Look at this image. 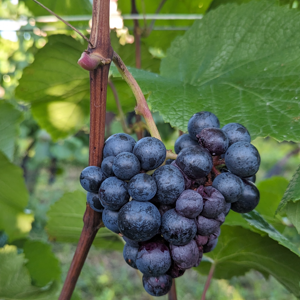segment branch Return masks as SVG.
<instances>
[{
  "instance_id": "30e6481e",
  "label": "branch",
  "mask_w": 300,
  "mask_h": 300,
  "mask_svg": "<svg viewBox=\"0 0 300 300\" xmlns=\"http://www.w3.org/2000/svg\"><path fill=\"white\" fill-rule=\"evenodd\" d=\"M89 71L90 80V133L89 164L101 168L105 142L106 96L108 85L114 94L117 110L121 117V127L129 135L136 133L139 139L144 137L143 130L149 133L142 116L135 112V125L127 127L126 118L120 107L118 92L109 78L111 62L110 39V0H93L92 28L87 49L77 62Z\"/></svg>"
},
{
  "instance_id": "325d2c04",
  "label": "branch",
  "mask_w": 300,
  "mask_h": 300,
  "mask_svg": "<svg viewBox=\"0 0 300 300\" xmlns=\"http://www.w3.org/2000/svg\"><path fill=\"white\" fill-rule=\"evenodd\" d=\"M104 227L102 213L94 211L86 202V210L83 215V229L80 235L79 244L70 261L69 270L58 300L71 299L81 270L86 262L90 247L92 246L98 231Z\"/></svg>"
},
{
  "instance_id": "170604dd",
  "label": "branch",
  "mask_w": 300,
  "mask_h": 300,
  "mask_svg": "<svg viewBox=\"0 0 300 300\" xmlns=\"http://www.w3.org/2000/svg\"><path fill=\"white\" fill-rule=\"evenodd\" d=\"M131 15L133 19L134 36H135V61L136 68H141V41L139 33V11L136 9V0H131Z\"/></svg>"
}]
</instances>
